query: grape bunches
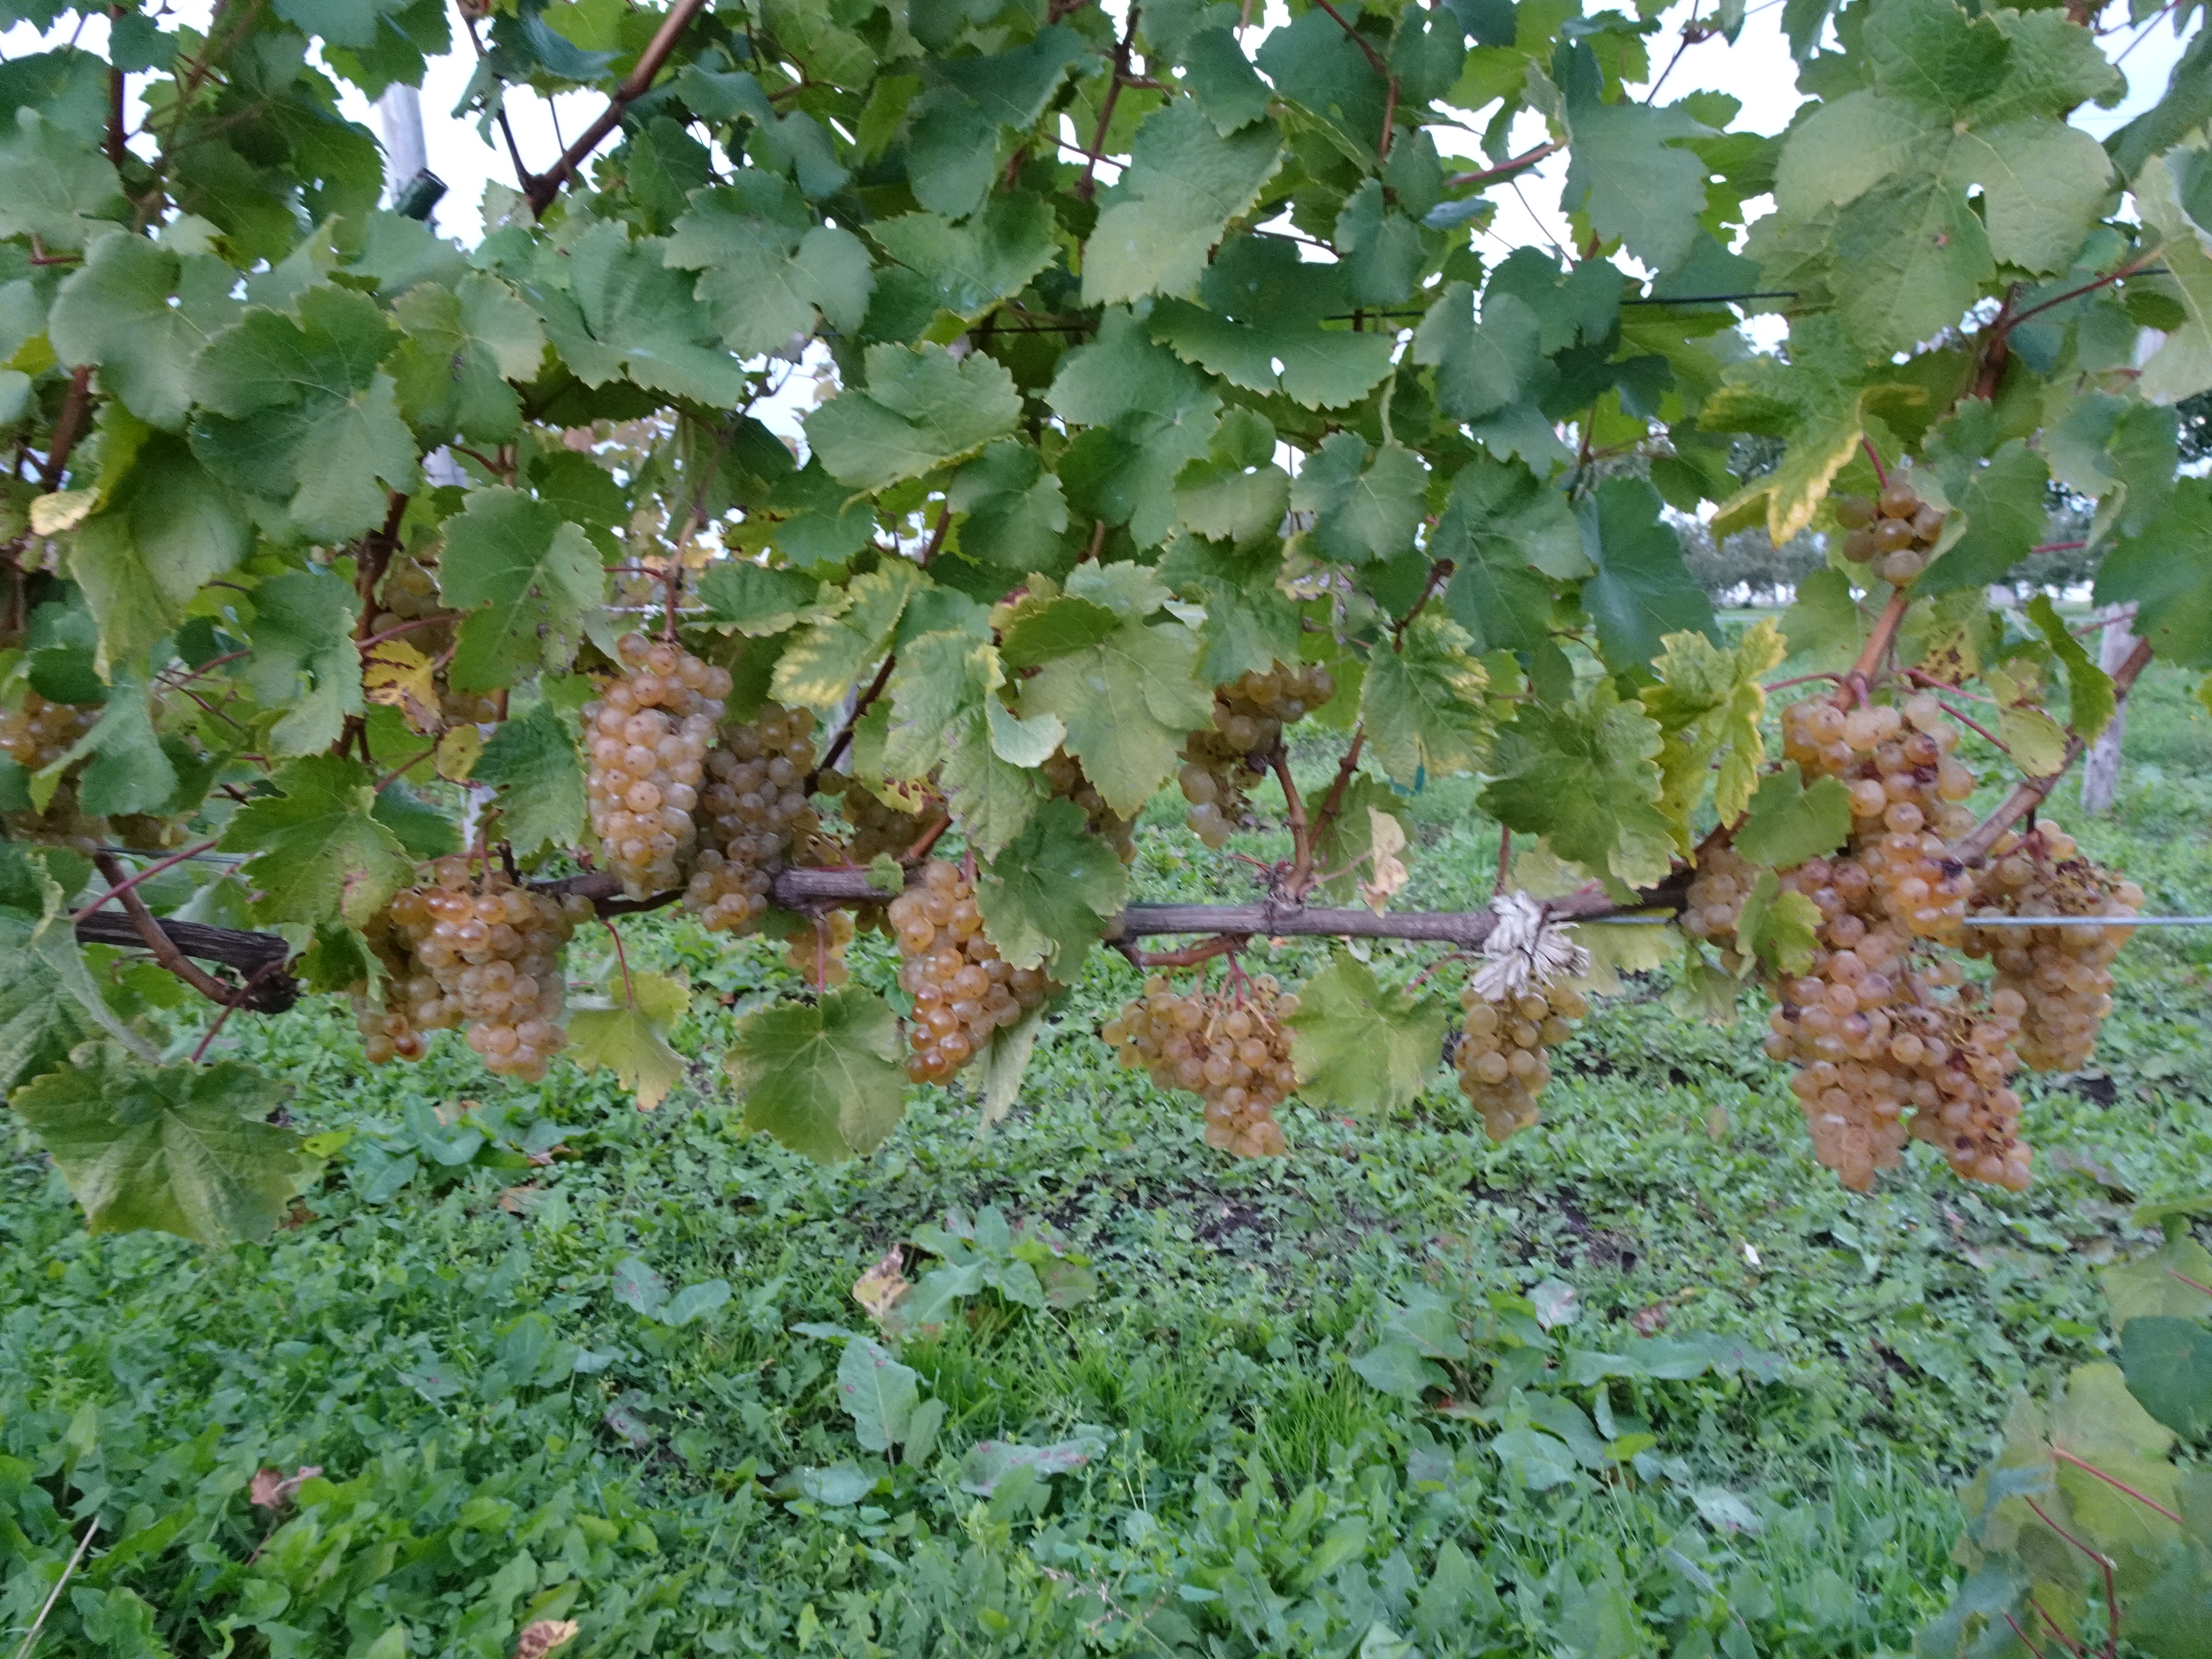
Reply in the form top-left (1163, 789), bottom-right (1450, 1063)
top-left (387, 857), bottom-right (595, 1085)
top-left (1045, 758), bottom-right (1145, 868)
top-left (1976, 816), bottom-right (2150, 1077)
top-left (1833, 484), bottom-right (1951, 588)
top-left (1902, 959), bottom-right (2036, 1200)
top-left (1753, 854), bottom-right (1885, 955)
top-left (1210, 663), bottom-right (1346, 760)
top-left (681, 700), bottom-right (825, 929)
top-left (1101, 972), bottom-right (1205, 1094)
top-left (117, 804), bottom-right (199, 857)
top-left (0, 805), bottom-right (109, 868)
top-left (578, 635), bottom-right (733, 902)
top-left (427, 671), bottom-right (502, 740)
top-left (1845, 738), bottom-right (1985, 947)
top-left (1176, 730), bottom-right (1266, 855)
top-left (880, 857), bottom-right (997, 1086)
top-left (1676, 833), bottom-right (1774, 943)
top-left (1449, 981), bottom-right (1590, 1143)
top-left (368, 527), bottom-right (457, 640)
top-left (1158, 972), bottom-right (1303, 1161)
top-left (340, 916), bottom-right (449, 1065)
top-left (1777, 693), bottom-right (1981, 798)
top-left (964, 926), bottom-right (1064, 1035)
top-left (818, 765), bottom-right (943, 862)
top-left (1762, 948), bottom-right (1910, 1194)
top-left (2, 685), bottom-right (111, 782)
top-left (781, 903), bottom-right (867, 990)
